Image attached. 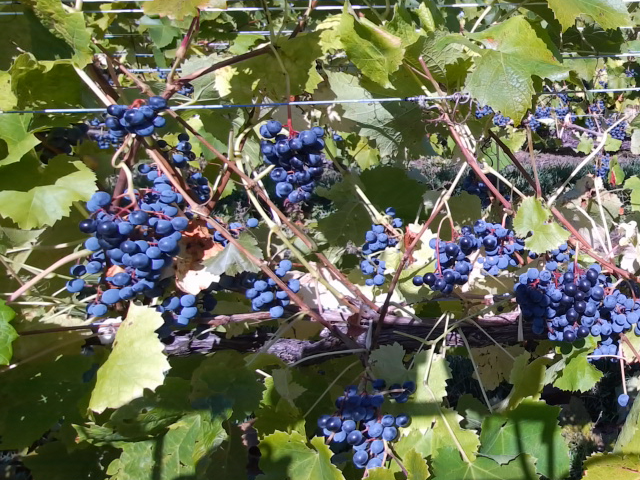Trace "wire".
<instances>
[{"label": "wire", "mask_w": 640, "mask_h": 480, "mask_svg": "<svg viewBox=\"0 0 640 480\" xmlns=\"http://www.w3.org/2000/svg\"><path fill=\"white\" fill-rule=\"evenodd\" d=\"M629 91H640V85L627 86L624 88H563L548 92L536 91L535 95L539 97H550L565 93H626Z\"/></svg>", "instance_id": "4"}, {"label": "wire", "mask_w": 640, "mask_h": 480, "mask_svg": "<svg viewBox=\"0 0 640 480\" xmlns=\"http://www.w3.org/2000/svg\"><path fill=\"white\" fill-rule=\"evenodd\" d=\"M108 112L107 108H81V107H69L59 109H42L39 111H9L0 110V115L7 116H41L44 114H61L70 113L71 115L80 114H105Z\"/></svg>", "instance_id": "2"}, {"label": "wire", "mask_w": 640, "mask_h": 480, "mask_svg": "<svg viewBox=\"0 0 640 480\" xmlns=\"http://www.w3.org/2000/svg\"><path fill=\"white\" fill-rule=\"evenodd\" d=\"M264 7H219V8H207L203 7L202 11L205 13H221V12H238V13H251V12H260L263 11Z\"/></svg>", "instance_id": "5"}, {"label": "wire", "mask_w": 640, "mask_h": 480, "mask_svg": "<svg viewBox=\"0 0 640 480\" xmlns=\"http://www.w3.org/2000/svg\"><path fill=\"white\" fill-rule=\"evenodd\" d=\"M548 1L538 2H457L451 4L436 3V8L454 9L459 7H540L548 6Z\"/></svg>", "instance_id": "3"}, {"label": "wire", "mask_w": 640, "mask_h": 480, "mask_svg": "<svg viewBox=\"0 0 640 480\" xmlns=\"http://www.w3.org/2000/svg\"><path fill=\"white\" fill-rule=\"evenodd\" d=\"M466 98L469 99L470 95L468 93H458L452 95H418V96H397V97H387V98H379V99H324L317 101H299V100H287L281 101L278 103H261L258 101H252L249 103H233V104H199V105H170V110H184V111H194L201 109H235V108H251V107H259V108H280L289 105H297V106H320L326 104H381V103H390V102H399V101H420V100H454Z\"/></svg>", "instance_id": "1"}]
</instances>
